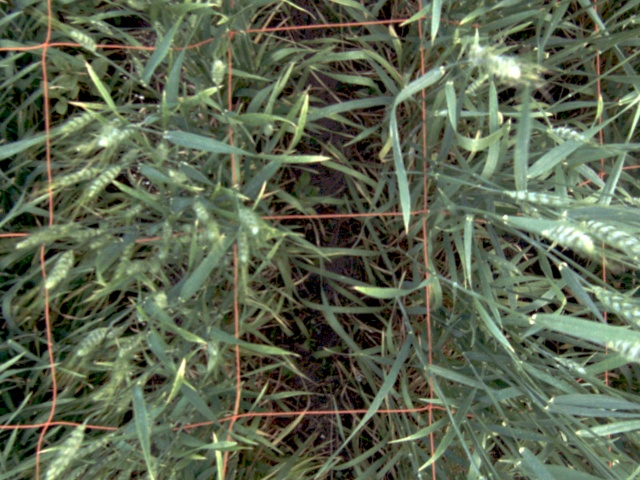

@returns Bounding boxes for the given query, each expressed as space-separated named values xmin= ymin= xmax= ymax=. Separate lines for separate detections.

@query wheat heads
xmin=57 ymin=167 xmax=92 ymax=186
xmin=115 ymin=242 xmax=137 ymax=280
xmin=210 ymin=60 xmax=226 ymax=85
xmin=119 ymin=336 xmax=146 ymax=355
xmin=88 ymin=168 xmax=119 ymax=196
xmin=236 ymin=238 xmax=251 ymax=261
xmin=507 ymin=187 xmax=575 ymax=208
xmin=605 ymin=339 xmax=638 ymax=362
xmin=101 ymin=127 xmax=135 ymax=149
xmin=65 ymin=31 xmax=95 ymax=53
xmin=18 ymin=222 xmax=71 ymax=245
xmin=62 ymin=110 xmax=96 ymax=131
xmin=98 ymin=374 xmax=127 ymax=397
xmin=83 ymin=431 xmax=119 ymax=452
xmin=91 ymin=234 xmax=111 ymax=252
xmin=468 ymin=73 xmax=493 ymax=91
xmin=46 ymin=250 xmax=71 ymax=285
xmin=484 ymin=52 xmax=521 ymax=78
xmin=541 ymin=224 xmax=588 ymax=248
xmin=595 ymin=285 xmax=638 ymax=324
xmin=193 ymin=201 xmax=213 ymax=222
xmin=155 ymin=292 xmax=170 ymax=311
xmin=75 ymin=326 xmax=103 ymax=360
xmin=48 ymin=423 xmax=84 ymax=480
xmin=159 ymin=221 xmax=175 ymax=260
xmin=121 ymin=206 xmax=141 ymax=218
xmin=236 ymin=204 xmax=262 ymax=234
xmin=551 ymin=121 xmax=591 ymax=146
xmin=554 ymin=357 xmax=584 ymax=377
xmin=581 ymin=216 xmax=639 ymax=260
